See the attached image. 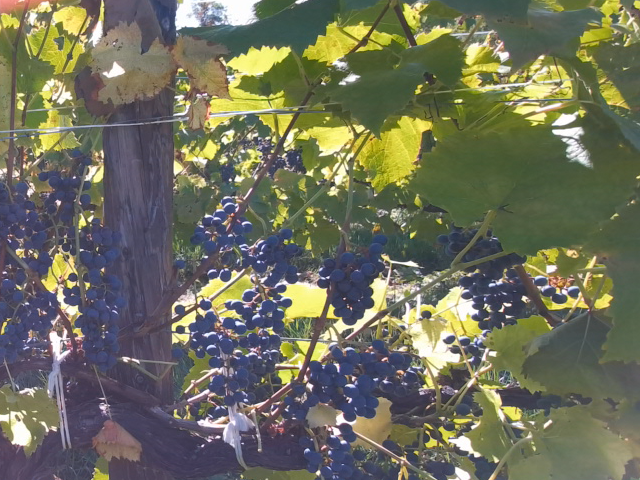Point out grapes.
<instances>
[{
    "mask_svg": "<svg viewBox=\"0 0 640 480\" xmlns=\"http://www.w3.org/2000/svg\"><path fill=\"white\" fill-rule=\"evenodd\" d=\"M220 205L223 208L215 210L213 215H205L202 218V225L194 229L190 243L194 246L202 245L207 255L230 249L236 243L239 246L241 258L235 260V268L242 270L251 266L255 272L265 273L268 265L275 264L272 274L263 279L265 286L275 288L268 290L270 299L257 298L261 305L256 313L254 312L257 310L256 304L244 307L243 302H250L254 298L260 291L259 285H256L255 289L245 290L242 300L225 301V308L228 311L235 310L238 315L243 316L244 323L241 319L225 317L222 322L224 329H231L237 335L257 329V332H248L246 337H240L238 340L227 337L225 333L214 332L218 316L213 311H209L213 306L212 301L202 299L199 302V308L206 311L204 317L197 315L188 326V330L193 332L190 349L194 351L196 358H203L207 351L211 356L209 364L212 368L224 366V361L219 356L220 351L231 354L229 365L234 372L231 376L226 373L215 375L208 383V389L216 396H224L226 406H234L237 403L254 405L271 393L269 385L255 386V384H260L265 374L273 373L277 362L287 360V355L278 350L281 344L280 336L278 334L268 336L266 328H271L274 333H281L285 329L283 321L285 311L279 307L289 308L293 305V300L290 297H283L282 294L287 291V286L279 283L283 274H286L287 284L295 285L298 282L297 267L290 265L288 259L301 257L303 248L295 242L284 244V240L293 237V231L290 228H283L277 235L270 234L265 240L260 241L255 247L254 254H250L249 245L241 233H251L254 225L247 217H238L230 227L229 234H225L226 225L223 222L228 219V215L236 213V203L231 195H223L220 198Z\"/></svg>",
    "mask_w": 640,
    "mask_h": 480,
    "instance_id": "01657485",
    "label": "grapes"
},
{
    "mask_svg": "<svg viewBox=\"0 0 640 480\" xmlns=\"http://www.w3.org/2000/svg\"><path fill=\"white\" fill-rule=\"evenodd\" d=\"M371 347L380 355L386 356V361H379L373 352H358L353 347H347L343 351L335 348L332 352L337 366L334 362L322 365L319 360H311L309 369L311 375L309 382L313 386L311 393L306 395V400L300 404L295 403L292 397H286L284 403L287 405L282 417L287 420L296 418L303 420L306 413L321 404H333V408L343 413V420L348 423H341L338 431L343 434L344 440H339L335 436H328L326 444L328 447V457L333 459L328 466H322L320 473L315 480H399L401 469L393 467L384 470L375 466L372 461L363 464V470L371 474H363L356 468L355 461H363L365 453L354 451L347 455L351 449V443L357 440V434L353 431L349 423L356 421V416L366 419H373L376 416V409L379 400L374 397L371 390L379 389L384 393L394 394L403 398L407 389L405 385H413L417 380V374L422 372L420 367H411V357L403 352H390L386 344L375 339ZM361 365L365 374L358 375L353 384H347L345 376L351 375L355 367ZM402 373L403 383L398 382L394 377L398 370Z\"/></svg>",
    "mask_w": 640,
    "mask_h": 480,
    "instance_id": "b958b902",
    "label": "grapes"
},
{
    "mask_svg": "<svg viewBox=\"0 0 640 480\" xmlns=\"http://www.w3.org/2000/svg\"><path fill=\"white\" fill-rule=\"evenodd\" d=\"M91 226L82 227L77 236L80 262L89 270L83 275V281L93 287H99L105 282L111 291L123 288L122 281L115 274L101 275L103 268H111L113 261L120 256L117 248H107L113 242H120L122 234L110 228H102V219L93 217ZM111 291L101 288L88 289L86 298L93 302L81 303V292L78 286L63 290L64 303L67 306L78 305L82 313L75 321V326L81 328V334L90 340L82 342V348L87 350L90 362L99 363L101 371H108L117 365V357L112 352L120 350V343L116 340L119 332V308L125 306L123 297H115Z\"/></svg>",
    "mask_w": 640,
    "mask_h": 480,
    "instance_id": "0513c4c2",
    "label": "grapes"
},
{
    "mask_svg": "<svg viewBox=\"0 0 640 480\" xmlns=\"http://www.w3.org/2000/svg\"><path fill=\"white\" fill-rule=\"evenodd\" d=\"M526 261V255L521 257L517 254H506L500 259L466 268V273H474L476 270L478 273L459 279V286L465 289L461 292V298L473 299L471 307L479 309L471 315V319L479 322L478 327L482 330L483 338L488 336L493 327L501 331L503 325L517 324L515 319L506 316H517L521 312L525 306L522 298L526 294V286L512 266ZM503 269H506L507 280L511 283L498 282L495 286H489L491 281L502 278Z\"/></svg>",
    "mask_w": 640,
    "mask_h": 480,
    "instance_id": "84f90ec7",
    "label": "grapes"
},
{
    "mask_svg": "<svg viewBox=\"0 0 640 480\" xmlns=\"http://www.w3.org/2000/svg\"><path fill=\"white\" fill-rule=\"evenodd\" d=\"M387 244L385 235H376L371 239L368 247V256H359L355 253L344 252L341 254L342 269L334 268V259H326L323 268L318 271L321 278L317 281L319 289H327L332 282H337L335 294L332 299L334 316L347 326H354L358 320L364 317L365 310L374 307L373 288L369 285L375 282L379 272L385 270V264L378 260V254L383 252V246Z\"/></svg>",
    "mask_w": 640,
    "mask_h": 480,
    "instance_id": "f8a65327",
    "label": "grapes"
},
{
    "mask_svg": "<svg viewBox=\"0 0 640 480\" xmlns=\"http://www.w3.org/2000/svg\"><path fill=\"white\" fill-rule=\"evenodd\" d=\"M13 300L17 306L16 315L19 322H13L5 327V335H0V365L7 361L15 360L19 348L24 345V339L29 337V332L34 329L41 338L48 336L51 322L57 317L59 303L55 292L43 291L31 298L29 304H22L24 293L15 291Z\"/></svg>",
    "mask_w": 640,
    "mask_h": 480,
    "instance_id": "5460f4e3",
    "label": "grapes"
},
{
    "mask_svg": "<svg viewBox=\"0 0 640 480\" xmlns=\"http://www.w3.org/2000/svg\"><path fill=\"white\" fill-rule=\"evenodd\" d=\"M14 188L17 191V195L14 197V202H12L5 185L0 183L1 242L11 250H17L19 243L8 236L10 233L14 234L17 239L32 236V241H26L23 244V248L25 250L41 249L47 239V232L45 231V225L41 221H37L39 218L37 211L29 213L25 211L35 208L33 201H24L28 185L25 182H20L16 183Z\"/></svg>",
    "mask_w": 640,
    "mask_h": 480,
    "instance_id": "83cd7487",
    "label": "grapes"
},
{
    "mask_svg": "<svg viewBox=\"0 0 640 480\" xmlns=\"http://www.w3.org/2000/svg\"><path fill=\"white\" fill-rule=\"evenodd\" d=\"M38 180L40 182H47L51 188H57L56 192H52L48 195V199L44 201V205L47 207L46 212L48 214H56L58 212L57 200H63V209L60 214V220L65 223H71L75 213L74 199L76 197L77 189L80 186V181L77 176L60 178V174L57 171L49 170L48 172H40L38 174Z\"/></svg>",
    "mask_w": 640,
    "mask_h": 480,
    "instance_id": "e5b3c951",
    "label": "grapes"
},
{
    "mask_svg": "<svg viewBox=\"0 0 640 480\" xmlns=\"http://www.w3.org/2000/svg\"><path fill=\"white\" fill-rule=\"evenodd\" d=\"M450 227L452 231L448 235H437L435 243L437 245H449L448 255L455 257L467 243L473 240V236L478 233V230L473 229L465 235L463 230L460 227H456L454 222L450 223Z\"/></svg>",
    "mask_w": 640,
    "mask_h": 480,
    "instance_id": "2adb6a1f",
    "label": "grapes"
},
{
    "mask_svg": "<svg viewBox=\"0 0 640 480\" xmlns=\"http://www.w3.org/2000/svg\"><path fill=\"white\" fill-rule=\"evenodd\" d=\"M486 237H479L477 241L461 256V262L484 254L495 253L503 250L502 243L498 237H492V230H486Z\"/></svg>",
    "mask_w": 640,
    "mask_h": 480,
    "instance_id": "ef6de9ee",
    "label": "grapes"
},
{
    "mask_svg": "<svg viewBox=\"0 0 640 480\" xmlns=\"http://www.w3.org/2000/svg\"><path fill=\"white\" fill-rule=\"evenodd\" d=\"M533 284L537 287L545 286L547 284V277L545 275H539L533 279ZM556 292L557 289L553 285H547L541 290V295L546 299H551L555 304H566L568 302V296L571 299H577L579 297L580 289L577 286H569L566 294Z\"/></svg>",
    "mask_w": 640,
    "mask_h": 480,
    "instance_id": "1ff8f66d",
    "label": "grapes"
},
{
    "mask_svg": "<svg viewBox=\"0 0 640 480\" xmlns=\"http://www.w3.org/2000/svg\"><path fill=\"white\" fill-rule=\"evenodd\" d=\"M453 452L456 455L468 456L469 460L475 464L478 469L474 472V476L480 480H488L498 468L496 462H489L484 456L476 457L473 453H470L468 449H462L458 446L453 448Z\"/></svg>",
    "mask_w": 640,
    "mask_h": 480,
    "instance_id": "54f908b8",
    "label": "grapes"
},
{
    "mask_svg": "<svg viewBox=\"0 0 640 480\" xmlns=\"http://www.w3.org/2000/svg\"><path fill=\"white\" fill-rule=\"evenodd\" d=\"M299 445L306 446V450L304 451V455L308 460V463L306 464V470L310 474H315L318 470V467L323 462V454L321 452H318L316 448L311 447L313 445V439L308 435H301L299 437Z\"/></svg>",
    "mask_w": 640,
    "mask_h": 480,
    "instance_id": "91a60905",
    "label": "grapes"
},
{
    "mask_svg": "<svg viewBox=\"0 0 640 480\" xmlns=\"http://www.w3.org/2000/svg\"><path fill=\"white\" fill-rule=\"evenodd\" d=\"M459 344L465 347L467 354L472 356L470 358V364L472 366H479L483 359V354L487 352L486 344L480 338H475L473 344H471V339L468 336H461L459 338Z\"/></svg>",
    "mask_w": 640,
    "mask_h": 480,
    "instance_id": "dcf779d0",
    "label": "grapes"
},
{
    "mask_svg": "<svg viewBox=\"0 0 640 480\" xmlns=\"http://www.w3.org/2000/svg\"><path fill=\"white\" fill-rule=\"evenodd\" d=\"M22 261L29 265L31 270H35L38 274L46 275L49 271V268L53 266V259L49 257V253L47 251H42L37 259L32 257H22Z\"/></svg>",
    "mask_w": 640,
    "mask_h": 480,
    "instance_id": "802abce8",
    "label": "grapes"
},
{
    "mask_svg": "<svg viewBox=\"0 0 640 480\" xmlns=\"http://www.w3.org/2000/svg\"><path fill=\"white\" fill-rule=\"evenodd\" d=\"M425 470L433 474L435 480H448L447 476L455 472V466L451 463H442L440 461H431Z\"/></svg>",
    "mask_w": 640,
    "mask_h": 480,
    "instance_id": "012428b0",
    "label": "grapes"
},
{
    "mask_svg": "<svg viewBox=\"0 0 640 480\" xmlns=\"http://www.w3.org/2000/svg\"><path fill=\"white\" fill-rule=\"evenodd\" d=\"M26 281V272L19 270L14 274V278H6L2 281L0 286V295H6L11 289H14L16 285H23Z\"/></svg>",
    "mask_w": 640,
    "mask_h": 480,
    "instance_id": "9fbda902",
    "label": "grapes"
},
{
    "mask_svg": "<svg viewBox=\"0 0 640 480\" xmlns=\"http://www.w3.org/2000/svg\"><path fill=\"white\" fill-rule=\"evenodd\" d=\"M473 399L470 395H465L462 398V404L456 406L455 414L457 416H466L472 407Z\"/></svg>",
    "mask_w": 640,
    "mask_h": 480,
    "instance_id": "34c12dc5",
    "label": "grapes"
},
{
    "mask_svg": "<svg viewBox=\"0 0 640 480\" xmlns=\"http://www.w3.org/2000/svg\"><path fill=\"white\" fill-rule=\"evenodd\" d=\"M201 405H202V402L201 401H197V402H194L193 405L190 407V410H191L190 411V415L192 417H195L196 421H204L205 420V417L198 413V411L201 409Z\"/></svg>",
    "mask_w": 640,
    "mask_h": 480,
    "instance_id": "4a4d1313",
    "label": "grapes"
},
{
    "mask_svg": "<svg viewBox=\"0 0 640 480\" xmlns=\"http://www.w3.org/2000/svg\"><path fill=\"white\" fill-rule=\"evenodd\" d=\"M58 244H59V245H62V250H63L64 252H67V251H69V250H70V254H71V255H75V254H76V247H75V246H72V247H71V245H70V244L65 243V240H64V239H59V240H58Z\"/></svg>",
    "mask_w": 640,
    "mask_h": 480,
    "instance_id": "23402543",
    "label": "grapes"
}]
</instances>
